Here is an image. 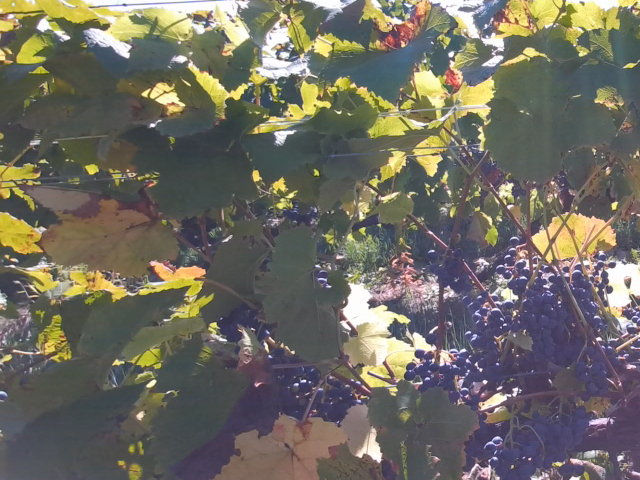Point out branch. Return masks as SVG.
Here are the masks:
<instances>
[{"mask_svg": "<svg viewBox=\"0 0 640 480\" xmlns=\"http://www.w3.org/2000/svg\"><path fill=\"white\" fill-rule=\"evenodd\" d=\"M461 153L470 161V163L474 167L469 172V175L464 178V181L462 183L460 205L458 207L457 214H456V217H455V220H454V230H453V232H452V234L450 236V239L448 240V244H446V242L443 239H441L433 230L429 229L425 224H423V222L417 216L413 215L412 213H408L407 217L409 219L415 221L416 224L422 230H424L428 235L433 237L444 249H447V256L451 257L452 256L453 243H454V241L456 239V236L458 235V232H459V222L461 220L463 209L465 207L466 195L469 194V186L471 185L472 180L474 178V175L477 172L479 178L489 187L490 193L496 199V201L498 202L499 206L504 211V213L509 217V219L517 227V229L520 232H522L524 234V236L526 237V241H527V244H528V271L530 273H532V276L527 281V286L528 287L532 286L533 282L536 280L538 274L540 273L542 265L543 264H545V265L549 264V261L546 259V256L550 253L551 257H552V259L554 261L555 269H554L553 265H550L549 266V272L552 275H556V274L559 275L561 281L563 282L564 291L568 294V296H569V298L571 300L572 306L574 308V311L578 315L582 326L584 327L585 331L588 333V335H589L590 339L592 340L593 344L595 345L597 351L602 355L603 359L607 363V366H608L612 376L614 377L615 382L618 385L619 392H605L604 396L605 397H617V398L625 399L626 398V391L624 390L623 383H622V381L620 379V376L617 373L616 369L614 368L611 359L609 358V356L607 355L605 350L602 348V346L600 345V342L595 337L592 329L590 328V326L588 325L587 321L585 320V317H584L582 311L580 310V308L578 306V303L576 301L574 293L569 288L568 280H567L564 272L560 268L559 259H558V256H557V254H556V252H555V250L553 248V244H552L559 238V236L561 235L564 227H566V230H567V233L569 235V238L571 239V242H572L573 247L575 249L578 262L580 263V268H581V271H582L583 276L585 278V283L591 289V291L593 293V297H594V299H595V301H596V303L598 305V308H599L600 312L602 313V315L604 316V318L606 319L607 324L611 328L612 334L618 340H620L621 342H624V343L618 345L615 348V352L619 353L622 349H625L626 347L631 345L633 342L639 340L640 339V333L636 334L635 336L631 337L629 340L625 341L624 334L619 329H617L616 325L612 321L611 317L609 316V313L607 312V310L603 306V303H602V301L600 299V296L598 294V290L594 286L593 282L590 280V276L588 274V270H587L586 265H585V260L582 257V253H581L579 244H578L577 239H576V237L574 235V232L572 231V227H571L570 223L568 222L569 218L573 215V213L575 212L576 208L598 186V183L597 182H593L584 191V193L572 204L570 210L564 215V217L562 216V214L560 212L556 213V217L560 221V225L557 228L556 233L552 237H551L549 226L547 224V219H546V204H547L548 193H549V191L551 189V186L547 185L544 188L543 196H542V202H541V221H542V226H543V229H544V233H545V237H546V243H547V247L548 248H546L542 252L540 246L537 245L531 238V236L533 235V232H532L531 183L530 182L526 183V202H527V229H526V228L522 227V225L514 217L512 212L507 208V206L503 202L502 198L496 192L493 183L484 175V173H483V171L481 169V167L483 166V164L485 163V161L487 160V158L489 156V151L488 150L484 151L483 156H482V158L480 159V161L478 163L474 159V157L467 151V147L466 148H462L461 149Z\"/></svg>", "mask_w": 640, "mask_h": 480, "instance_id": "obj_1", "label": "branch"}, {"mask_svg": "<svg viewBox=\"0 0 640 480\" xmlns=\"http://www.w3.org/2000/svg\"><path fill=\"white\" fill-rule=\"evenodd\" d=\"M561 393H564L565 395H568L570 397H581L582 396V392L581 391L572 392L571 390L546 391V392H540V393L515 395V396H513V397H511V398H509L507 400H504V401L496 404L495 406L478 409V410L475 411V414L476 415H480V414H484V413H488V412L497 411L498 409H501V408L509 405L511 401L515 402L517 400L542 398V397H548V396H559Z\"/></svg>", "mask_w": 640, "mask_h": 480, "instance_id": "obj_2", "label": "branch"}, {"mask_svg": "<svg viewBox=\"0 0 640 480\" xmlns=\"http://www.w3.org/2000/svg\"><path fill=\"white\" fill-rule=\"evenodd\" d=\"M443 287L438 288V298H439V324L437 329V334L435 338V363H440V341L443 332L444 326V296H443Z\"/></svg>", "mask_w": 640, "mask_h": 480, "instance_id": "obj_3", "label": "branch"}, {"mask_svg": "<svg viewBox=\"0 0 640 480\" xmlns=\"http://www.w3.org/2000/svg\"><path fill=\"white\" fill-rule=\"evenodd\" d=\"M461 266H462L463 270H464L465 272L469 273V274H470V276L473 278V280H474L475 284L477 285L478 289H479L480 291H483V290H484V286L482 285V283H481L480 279L478 278V275L475 273V271H474V270H472L471 268H469V267L467 266V264H466V261H465V260H462V261H461Z\"/></svg>", "mask_w": 640, "mask_h": 480, "instance_id": "obj_4", "label": "branch"}, {"mask_svg": "<svg viewBox=\"0 0 640 480\" xmlns=\"http://www.w3.org/2000/svg\"><path fill=\"white\" fill-rule=\"evenodd\" d=\"M362 184L365 185L366 187H368L369 189H371L372 191H374L377 195H379L381 198L385 197V193L383 191H381L380 189H378L376 186H374L372 183H370L367 180H363Z\"/></svg>", "mask_w": 640, "mask_h": 480, "instance_id": "obj_5", "label": "branch"}, {"mask_svg": "<svg viewBox=\"0 0 640 480\" xmlns=\"http://www.w3.org/2000/svg\"><path fill=\"white\" fill-rule=\"evenodd\" d=\"M441 129L444 132H446L447 134L451 135L456 140L457 144L462 143V139L460 138V136L458 134H456L455 131L451 130L446 125H442Z\"/></svg>", "mask_w": 640, "mask_h": 480, "instance_id": "obj_6", "label": "branch"}]
</instances>
